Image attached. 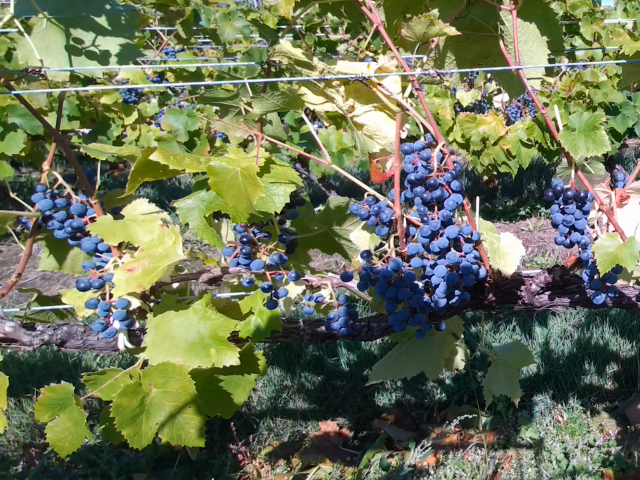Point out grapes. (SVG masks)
<instances>
[{
  "instance_id": "obj_2",
  "label": "grapes",
  "mask_w": 640,
  "mask_h": 480,
  "mask_svg": "<svg viewBox=\"0 0 640 480\" xmlns=\"http://www.w3.org/2000/svg\"><path fill=\"white\" fill-rule=\"evenodd\" d=\"M552 189L545 191V198L550 203L551 225L556 229L558 236L555 238L557 247L577 249L581 251L580 258L586 268L582 271V281L589 284L595 293L591 296V301L601 304L606 297L613 298L617 293L615 284L619 275L624 273V268L620 264H615L611 272L602 274L600 280L595 277L598 267L592 257L593 245L590 241L586 217L591 210V203L596 199L587 191H577L574 188L565 189V184L560 178L551 181Z\"/></svg>"
},
{
  "instance_id": "obj_6",
  "label": "grapes",
  "mask_w": 640,
  "mask_h": 480,
  "mask_svg": "<svg viewBox=\"0 0 640 480\" xmlns=\"http://www.w3.org/2000/svg\"><path fill=\"white\" fill-rule=\"evenodd\" d=\"M338 301L344 306L338 307L335 313L329 312L327 314L325 328L328 332H335L337 330L339 334L349 336L351 329L346 321H355L358 318V313L354 311L352 305H347L349 303V297L346 294H340Z\"/></svg>"
},
{
  "instance_id": "obj_13",
  "label": "grapes",
  "mask_w": 640,
  "mask_h": 480,
  "mask_svg": "<svg viewBox=\"0 0 640 480\" xmlns=\"http://www.w3.org/2000/svg\"><path fill=\"white\" fill-rule=\"evenodd\" d=\"M17 222L22 224V227H24L26 229V231H29L30 226H31V217L26 216H18L17 217Z\"/></svg>"
},
{
  "instance_id": "obj_11",
  "label": "grapes",
  "mask_w": 640,
  "mask_h": 480,
  "mask_svg": "<svg viewBox=\"0 0 640 480\" xmlns=\"http://www.w3.org/2000/svg\"><path fill=\"white\" fill-rule=\"evenodd\" d=\"M109 265V259L107 257L99 256L98 254H93L91 256V261H83L81 263V269L83 271H94V270H102Z\"/></svg>"
},
{
  "instance_id": "obj_5",
  "label": "grapes",
  "mask_w": 640,
  "mask_h": 480,
  "mask_svg": "<svg viewBox=\"0 0 640 480\" xmlns=\"http://www.w3.org/2000/svg\"><path fill=\"white\" fill-rule=\"evenodd\" d=\"M233 232L238 234L236 243L242 248L237 251V256L229 260L231 267L250 269L252 272L262 271L265 268V261L262 258L252 260L253 249L248 246L252 242V236L241 225H235Z\"/></svg>"
},
{
  "instance_id": "obj_7",
  "label": "grapes",
  "mask_w": 640,
  "mask_h": 480,
  "mask_svg": "<svg viewBox=\"0 0 640 480\" xmlns=\"http://www.w3.org/2000/svg\"><path fill=\"white\" fill-rule=\"evenodd\" d=\"M87 310L96 309L98 319L91 324L94 330L104 339L116 336V328L105 319L110 316L111 304L107 301L100 302L98 297H89L85 302Z\"/></svg>"
},
{
  "instance_id": "obj_1",
  "label": "grapes",
  "mask_w": 640,
  "mask_h": 480,
  "mask_svg": "<svg viewBox=\"0 0 640 480\" xmlns=\"http://www.w3.org/2000/svg\"><path fill=\"white\" fill-rule=\"evenodd\" d=\"M401 153L404 155L403 170L408 175L404 180L405 190L400 193V201L414 200L417 213L411 214L421 221L418 230L415 224L406 228L408 235L417 233L418 238V241L407 245V253L422 254V244L429 243V251L440 254L450 246L449 239L468 236L471 241L460 244L462 255L449 250L433 261L421 257L410 260L412 269H424V275L430 277V285L435 287L432 296L424 294V290L414 282L417 272L408 270L400 258H391L389 265L363 262L357 289L366 291L372 287L378 297L385 296V310L388 312L386 317L395 333H403L406 327L419 325L414 336L424 338L430 330L427 316L432 312L444 314L447 307H457L461 302H469L471 295L462 292V287L473 286L477 279H484L487 268L477 263L481 259V253L474 249L472 242L480 239V233L473 231L468 223L458 226L456 219L451 217L452 211L464 199L465 186L456 178L462 164L454 161L453 167L444 175L426 180L428 173L433 172L435 167L433 163L428 165L426 162L432 155L426 142H403ZM401 309H400V310H399V311H397V310H398V305H399V304H400V303H401V302H406V301H407V302H409V306H410V307H411V308H412V309H416V314H414V315H413V312H412V311H411V310H410V309H406V308H401ZM424 205H425V203H435V204H443V209H441V210H440V211H439V212H438V213H437V218H435V217H434V216H433V215H429V209H428V208H427V207H426V206H424ZM401 278H398V279H397V280H396V281H394V282H393V283H392V284H390V283H387V282H389V281H390V280H391V276H392V275H393V273H400V274H401V275H403V277H401Z\"/></svg>"
},
{
  "instance_id": "obj_3",
  "label": "grapes",
  "mask_w": 640,
  "mask_h": 480,
  "mask_svg": "<svg viewBox=\"0 0 640 480\" xmlns=\"http://www.w3.org/2000/svg\"><path fill=\"white\" fill-rule=\"evenodd\" d=\"M31 202L42 211L38 222L45 224L47 229H53L54 239H66L69 246H80L84 253L105 252L109 250V245H105L103 239L98 235L86 237L81 231L86 229L85 222L81 217L68 219V213L64 209L68 206V200L61 198V192L57 189L49 188L45 182H39L35 186V192L31 195Z\"/></svg>"
},
{
  "instance_id": "obj_9",
  "label": "grapes",
  "mask_w": 640,
  "mask_h": 480,
  "mask_svg": "<svg viewBox=\"0 0 640 480\" xmlns=\"http://www.w3.org/2000/svg\"><path fill=\"white\" fill-rule=\"evenodd\" d=\"M129 306V300L127 298H118L114 301V309L112 311V317L119 323V329L121 331L133 330L135 328V321L132 317H129V312L126 308Z\"/></svg>"
},
{
  "instance_id": "obj_10",
  "label": "grapes",
  "mask_w": 640,
  "mask_h": 480,
  "mask_svg": "<svg viewBox=\"0 0 640 480\" xmlns=\"http://www.w3.org/2000/svg\"><path fill=\"white\" fill-rule=\"evenodd\" d=\"M260 291L265 294L272 293L276 298L266 302V309L268 311H275L279 307V301L277 299H285L288 296V290L286 288H274L270 280H265L260 284Z\"/></svg>"
},
{
  "instance_id": "obj_8",
  "label": "grapes",
  "mask_w": 640,
  "mask_h": 480,
  "mask_svg": "<svg viewBox=\"0 0 640 480\" xmlns=\"http://www.w3.org/2000/svg\"><path fill=\"white\" fill-rule=\"evenodd\" d=\"M113 279L114 274L112 272H106L101 276L94 275L93 277H78L75 280V289L79 293L88 292L90 289L102 290L105 287V284H111Z\"/></svg>"
},
{
  "instance_id": "obj_12",
  "label": "grapes",
  "mask_w": 640,
  "mask_h": 480,
  "mask_svg": "<svg viewBox=\"0 0 640 480\" xmlns=\"http://www.w3.org/2000/svg\"><path fill=\"white\" fill-rule=\"evenodd\" d=\"M69 213L71 215H84L85 217L92 216L96 213V209L91 205H85L80 203L79 199H76V203L73 204V199L69 200Z\"/></svg>"
},
{
  "instance_id": "obj_4",
  "label": "grapes",
  "mask_w": 640,
  "mask_h": 480,
  "mask_svg": "<svg viewBox=\"0 0 640 480\" xmlns=\"http://www.w3.org/2000/svg\"><path fill=\"white\" fill-rule=\"evenodd\" d=\"M365 204L370 206L368 211L361 208L359 203H353L349 206V213L352 217H357L359 221H364L367 226L375 227L374 233L377 236H386L388 234V225L394 217V210L389 208V204L385 201H377L372 195L365 197Z\"/></svg>"
}]
</instances>
